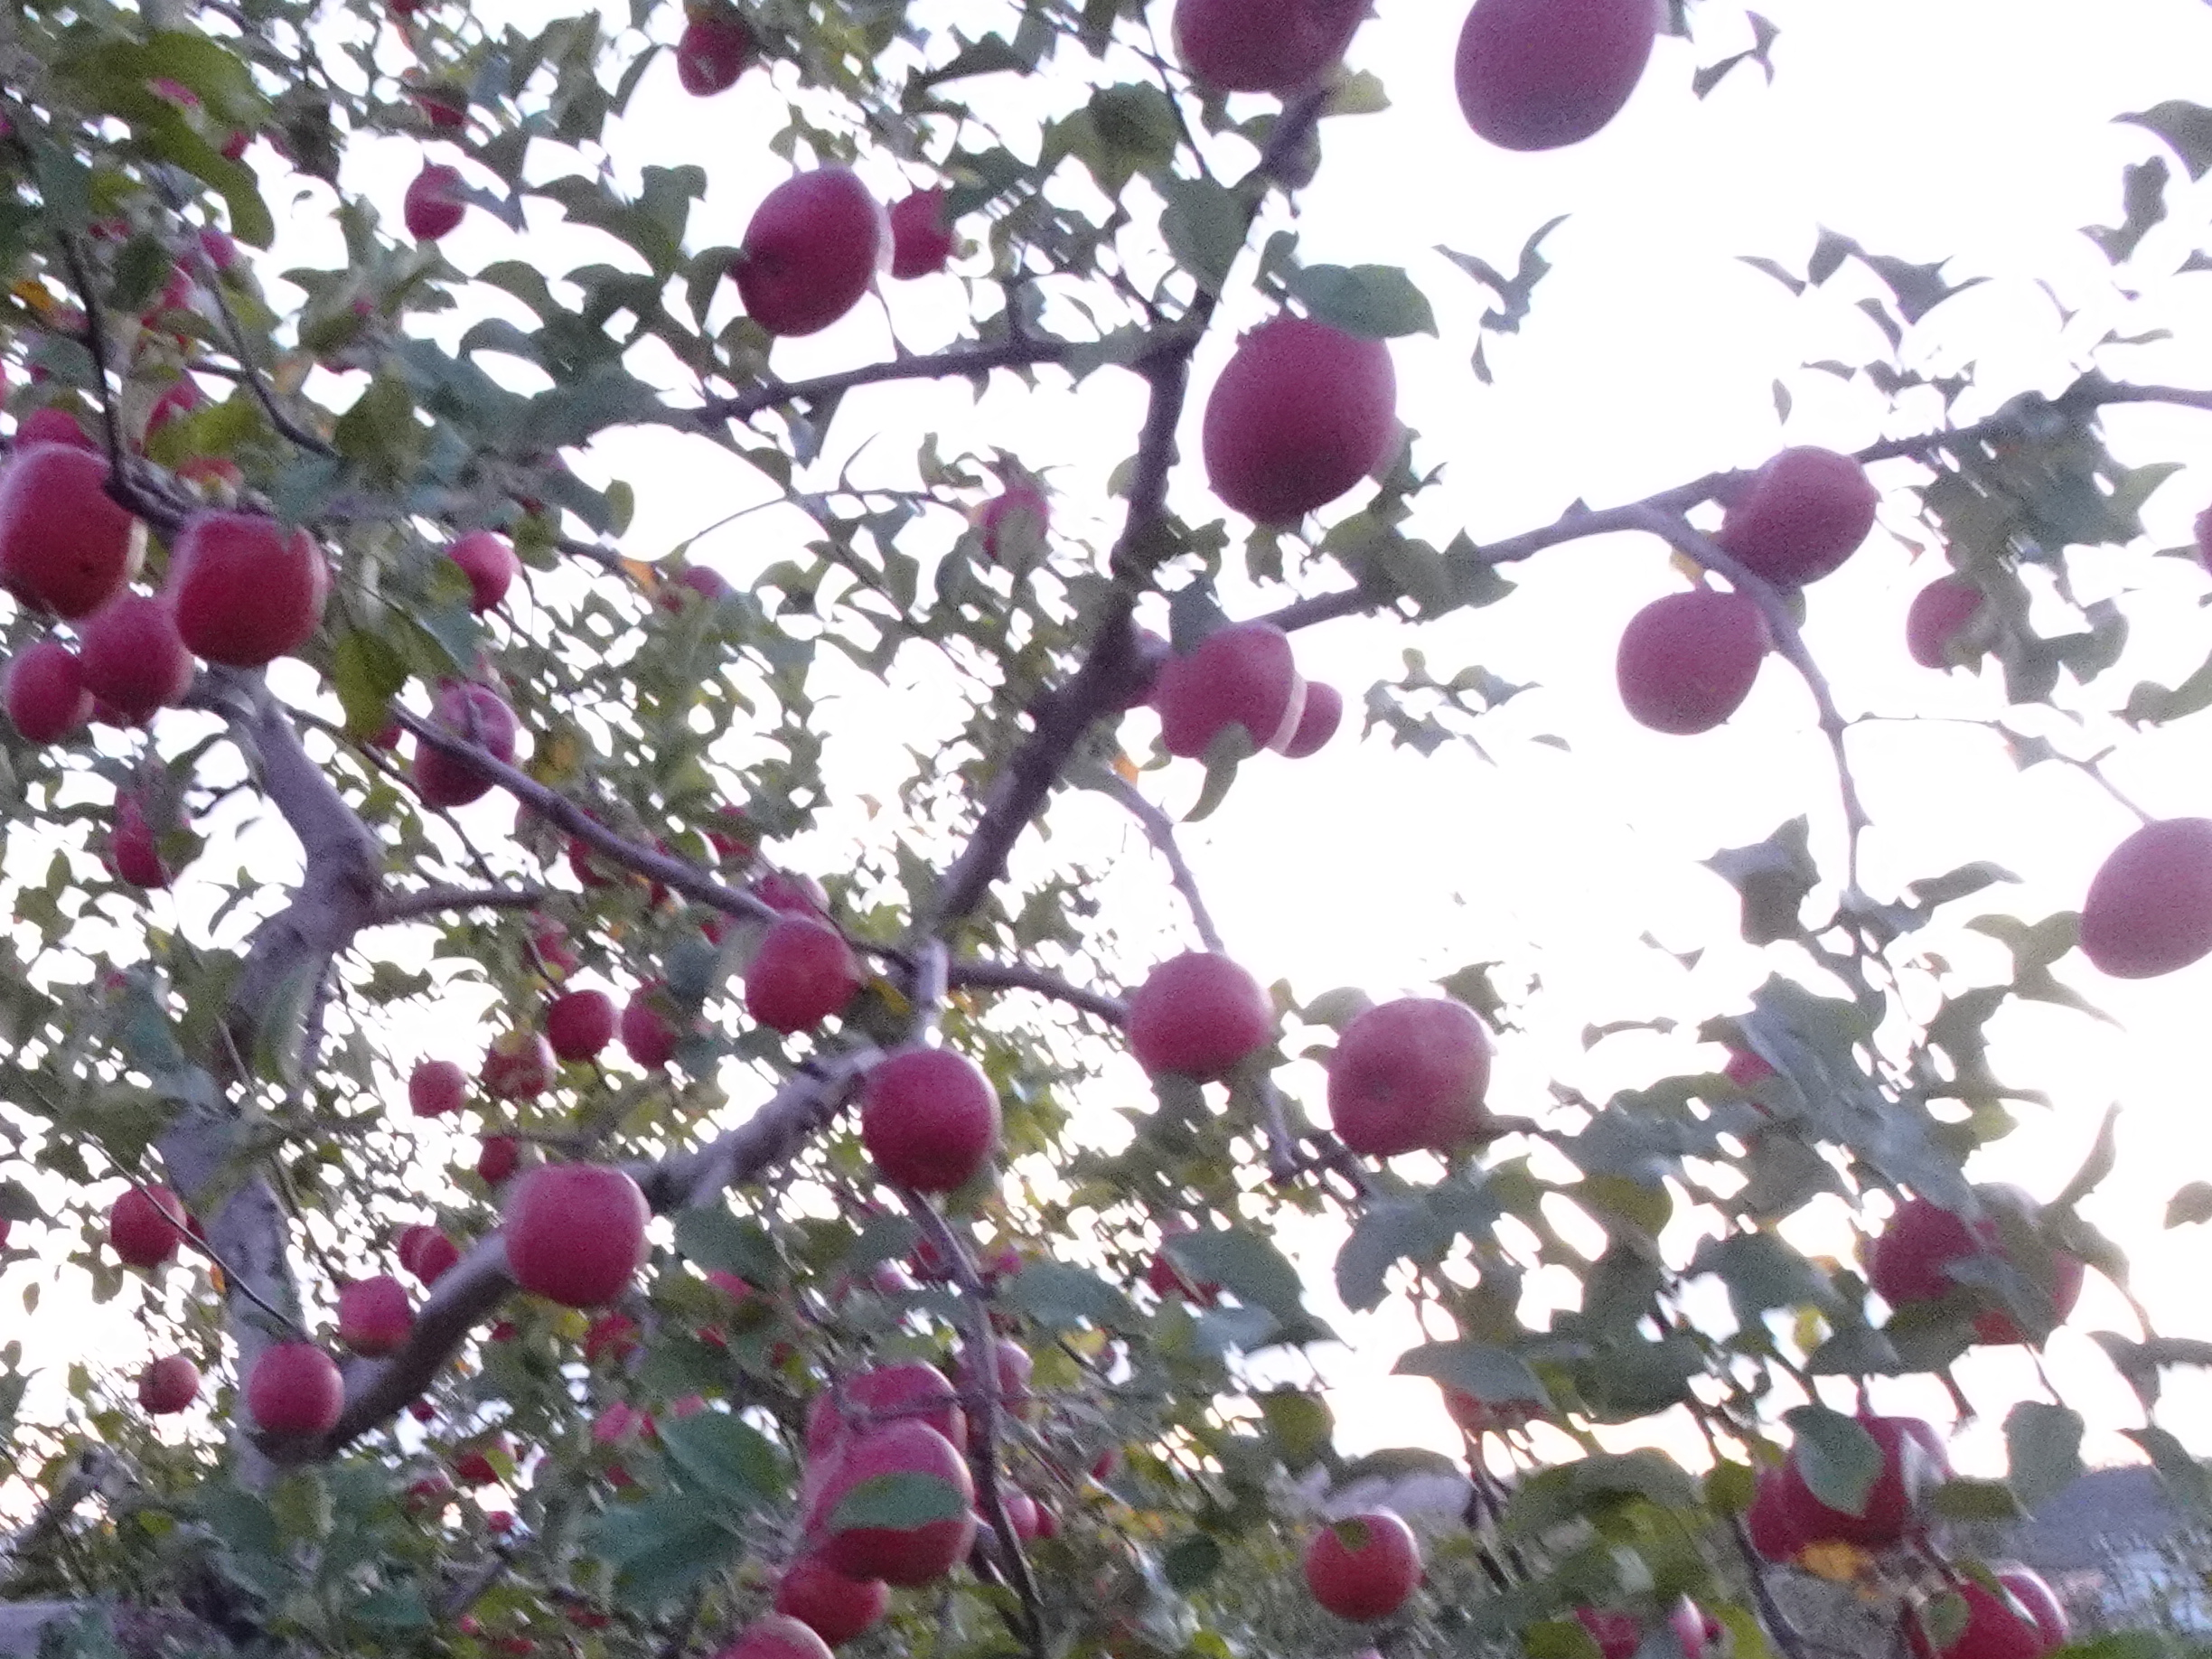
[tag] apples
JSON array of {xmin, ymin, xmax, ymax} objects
[
  {"xmin": 1127, "ymin": 951, "xmax": 1274, "ymax": 1084},
  {"xmin": 707, "ymin": 805, "xmax": 758, "ymax": 857},
  {"xmin": 477, "ymin": 1136, "xmax": 519, "ymax": 1184},
  {"xmin": 318, "ymin": 298, "xmax": 371, "ymax": 373},
  {"xmin": 404, "ymin": 165, "xmax": 466, "ymax": 241},
  {"xmin": 270, "ymin": 134, "xmax": 293, "ymax": 161},
  {"xmin": 806, "ymin": 1423, "xmax": 975, "ymax": 1587},
  {"xmin": 1045, "ymin": 1433, "xmax": 1109, "ymax": 1488},
  {"xmin": 700, "ymin": 1269, "xmax": 794, "ymax": 1364},
  {"xmin": 441, "ymin": 652, "xmax": 516, "ymax": 694},
  {"xmin": 0, "ymin": 443, "xmax": 134, "ymax": 619},
  {"xmin": 112, "ymin": 799, "xmax": 191, "ymax": 888},
  {"xmin": 1282, "ymin": 681, "xmax": 1343, "ymax": 758},
  {"xmin": 79, "ymin": 593, "xmax": 183, "ymax": 715},
  {"xmin": 570, "ymin": 810, "xmax": 620, "ymax": 888},
  {"xmin": 808, "ymin": 1362, "xmax": 964, "ymax": 1462},
  {"xmin": 0, "ymin": 102, "xmax": 12, "ymax": 136},
  {"xmin": 523, "ymin": 911, "xmax": 576, "ymax": 982},
  {"xmin": 700, "ymin": 911, "xmax": 735, "ymax": 945},
  {"xmin": 907, "ymin": 1238, "xmax": 953, "ymax": 1281},
  {"xmin": 138, "ymin": 1355, "xmax": 199, "ymax": 1414},
  {"xmin": 748, "ymin": 872, "xmax": 824, "ymax": 919},
  {"xmin": 982, "ymin": 492, "xmax": 1048, "ymax": 564},
  {"xmin": 503, "ymin": 1162, "xmax": 648, "ymax": 1308},
  {"xmin": 30, "ymin": 311, "xmax": 89, "ymax": 383},
  {"xmin": 583, "ymin": 1314, "xmax": 640, "ymax": 1365},
  {"xmin": 1034, "ymin": 1498, "xmax": 1054, "ymax": 1539},
  {"xmin": 649, "ymin": 839, "xmax": 668, "ymax": 908},
  {"xmin": 413, "ymin": 96, "xmax": 465, "ymax": 127},
  {"xmin": 1304, "ymin": 1514, "xmax": 1413, "ymax": 1622},
  {"xmin": 338, "ymin": 1275, "xmax": 411, "ymax": 1357},
  {"xmin": 1906, "ymin": 1568, "xmax": 2067, "ymax": 1659},
  {"xmin": 8, "ymin": 641, "xmax": 83, "ymax": 745},
  {"xmin": 1162, "ymin": 619, "xmax": 1294, "ymax": 757},
  {"xmin": 692, "ymin": 1612, "xmax": 842, "ymax": 1659},
  {"xmin": 1148, "ymin": 1252, "xmax": 1221, "ymax": 1300},
  {"xmin": 1442, "ymin": 1388, "xmax": 1543, "ymax": 1429},
  {"xmin": 145, "ymin": 368, "xmax": 195, "ymax": 436},
  {"xmin": 845, "ymin": 1270, "xmax": 908, "ymax": 1324},
  {"xmin": 1750, "ymin": 1467, "xmax": 1806, "ymax": 1564},
  {"xmin": 621, "ymin": 981, "xmax": 678, "ymax": 1069},
  {"xmin": 676, "ymin": 20, "xmax": 749, "ymax": 96},
  {"xmin": 491, "ymin": 1321, "xmax": 517, "ymax": 1342},
  {"xmin": 1577, "ymin": 1592, "xmax": 1705, "ymax": 1659},
  {"xmin": 593, "ymin": 1395, "xmax": 705, "ymax": 1488},
  {"xmin": 1784, "ymin": 1418, "xmax": 1950, "ymax": 1547},
  {"xmin": 419, "ymin": 1236, "xmax": 459, "ymax": 1289},
  {"xmin": 173, "ymin": 514, "xmax": 318, "ymax": 667},
  {"xmin": 951, "ymin": 1341, "xmax": 1033, "ymax": 1423},
  {"xmin": 734, "ymin": 169, "xmax": 880, "ymax": 336},
  {"xmin": 398, "ymin": 1225, "xmax": 434, "ymax": 1275},
  {"xmin": 1326, "ymin": 996, "xmax": 1493, "ymax": 1157},
  {"xmin": 743, "ymin": 915, "xmax": 854, "ymax": 1034},
  {"xmin": 1455, "ymin": 0, "xmax": 1658, "ymax": 150},
  {"xmin": 888, "ymin": 189, "xmax": 953, "ymax": 280},
  {"xmin": 177, "ymin": 229, "xmax": 234, "ymax": 278},
  {"xmin": 445, "ymin": 530, "xmax": 512, "ymax": 612},
  {"xmin": 407, "ymin": 1474, "xmax": 449, "ymax": 1517},
  {"xmin": 371, "ymin": 722, "xmax": 402, "ymax": 750},
  {"xmin": 158, "ymin": 75, "xmax": 245, "ymax": 159},
  {"xmin": 970, "ymin": 1486, "xmax": 1038, "ymax": 1541},
  {"xmin": 485, "ymin": 1030, "xmax": 546, "ymax": 1099},
  {"xmin": 15, "ymin": 407, "xmax": 109, "ymax": 457},
  {"xmin": 102, "ymin": 831, "xmax": 121, "ymax": 880},
  {"xmin": 2080, "ymin": 817, "xmax": 2212, "ymax": 978},
  {"xmin": 978, "ymin": 1255, "xmax": 1022, "ymax": 1285},
  {"xmin": 1906, "ymin": 577, "xmax": 1984, "ymax": 668},
  {"xmin": 659, "ymin": 566, "xmax": 726, "ymax": 612},
  {"xmin": 248, "ymin": 1343, "xmax": 344, "ymax": 1437},
  {"xmin": 412, "ymin": 686, "xmax": 515, "ymax": 806},
  {"xmin": 110, "ymin": 1184, "xmax": 186, "ymax": 1268},
  {"xmin": 454, "ymin": 1436, "xmax": 514, "ymax": 1483},
  {"xmin": 90, "ymin": 221, "xmax": 127, "ymax": 240},
  {"xmin": 1172, "ymin": 0, "xmax": 1371, "ymax": 92},
  {"xmin": 93, "ymin": 694, "xmax": 160, "ymax": 727},
  {"xmin": 182, "ymin": 1212, "xmax": 208, "ymax": 1253},
  {"xmin": 1973, "ymin": 1249, "xmax": 2083, "ymax": 1345},
  {"xmin": 1618, "ymin": 591, "xmax": 1770, "ymax": 734},
  {"xmin": 408, "ymin": 1060, "xmax": 465, "ymax": 1117},
  {"xmin": 860, "ymin": 1049, "xmax": 1000, "ymax": 1192},
  {"xmin": 112, "ymin": 782, "xmax": 131, "ymax": 813},
  {"xmin": 1724, "ymin": 1045, "xmax": 1777, "ymax": 1118},
  {"xmin": 177, "ymin": 459, "xmax": 235, "ymax": 483},
  {"xmin": 546, "ymin": 989, "xmax": 613, "ymax": 1061},
  {"xmin": 1871, "ymin": 1194, "xmax": 1995, "ymax": 1311},
  {"xmin": 1203, "ymin": 318, "xmax": 1396, "ymax": 521},
  {"xmin": 138, "ymin": 268, "xmax": 196, "ymax": 351},
  {"xmin": 1721, "ymin": 445, "xmax": 1876, "ymax": 588},
  {"xmin": 776, "ymin": 1557, "xmax": 877, "ymax": 1647}
]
